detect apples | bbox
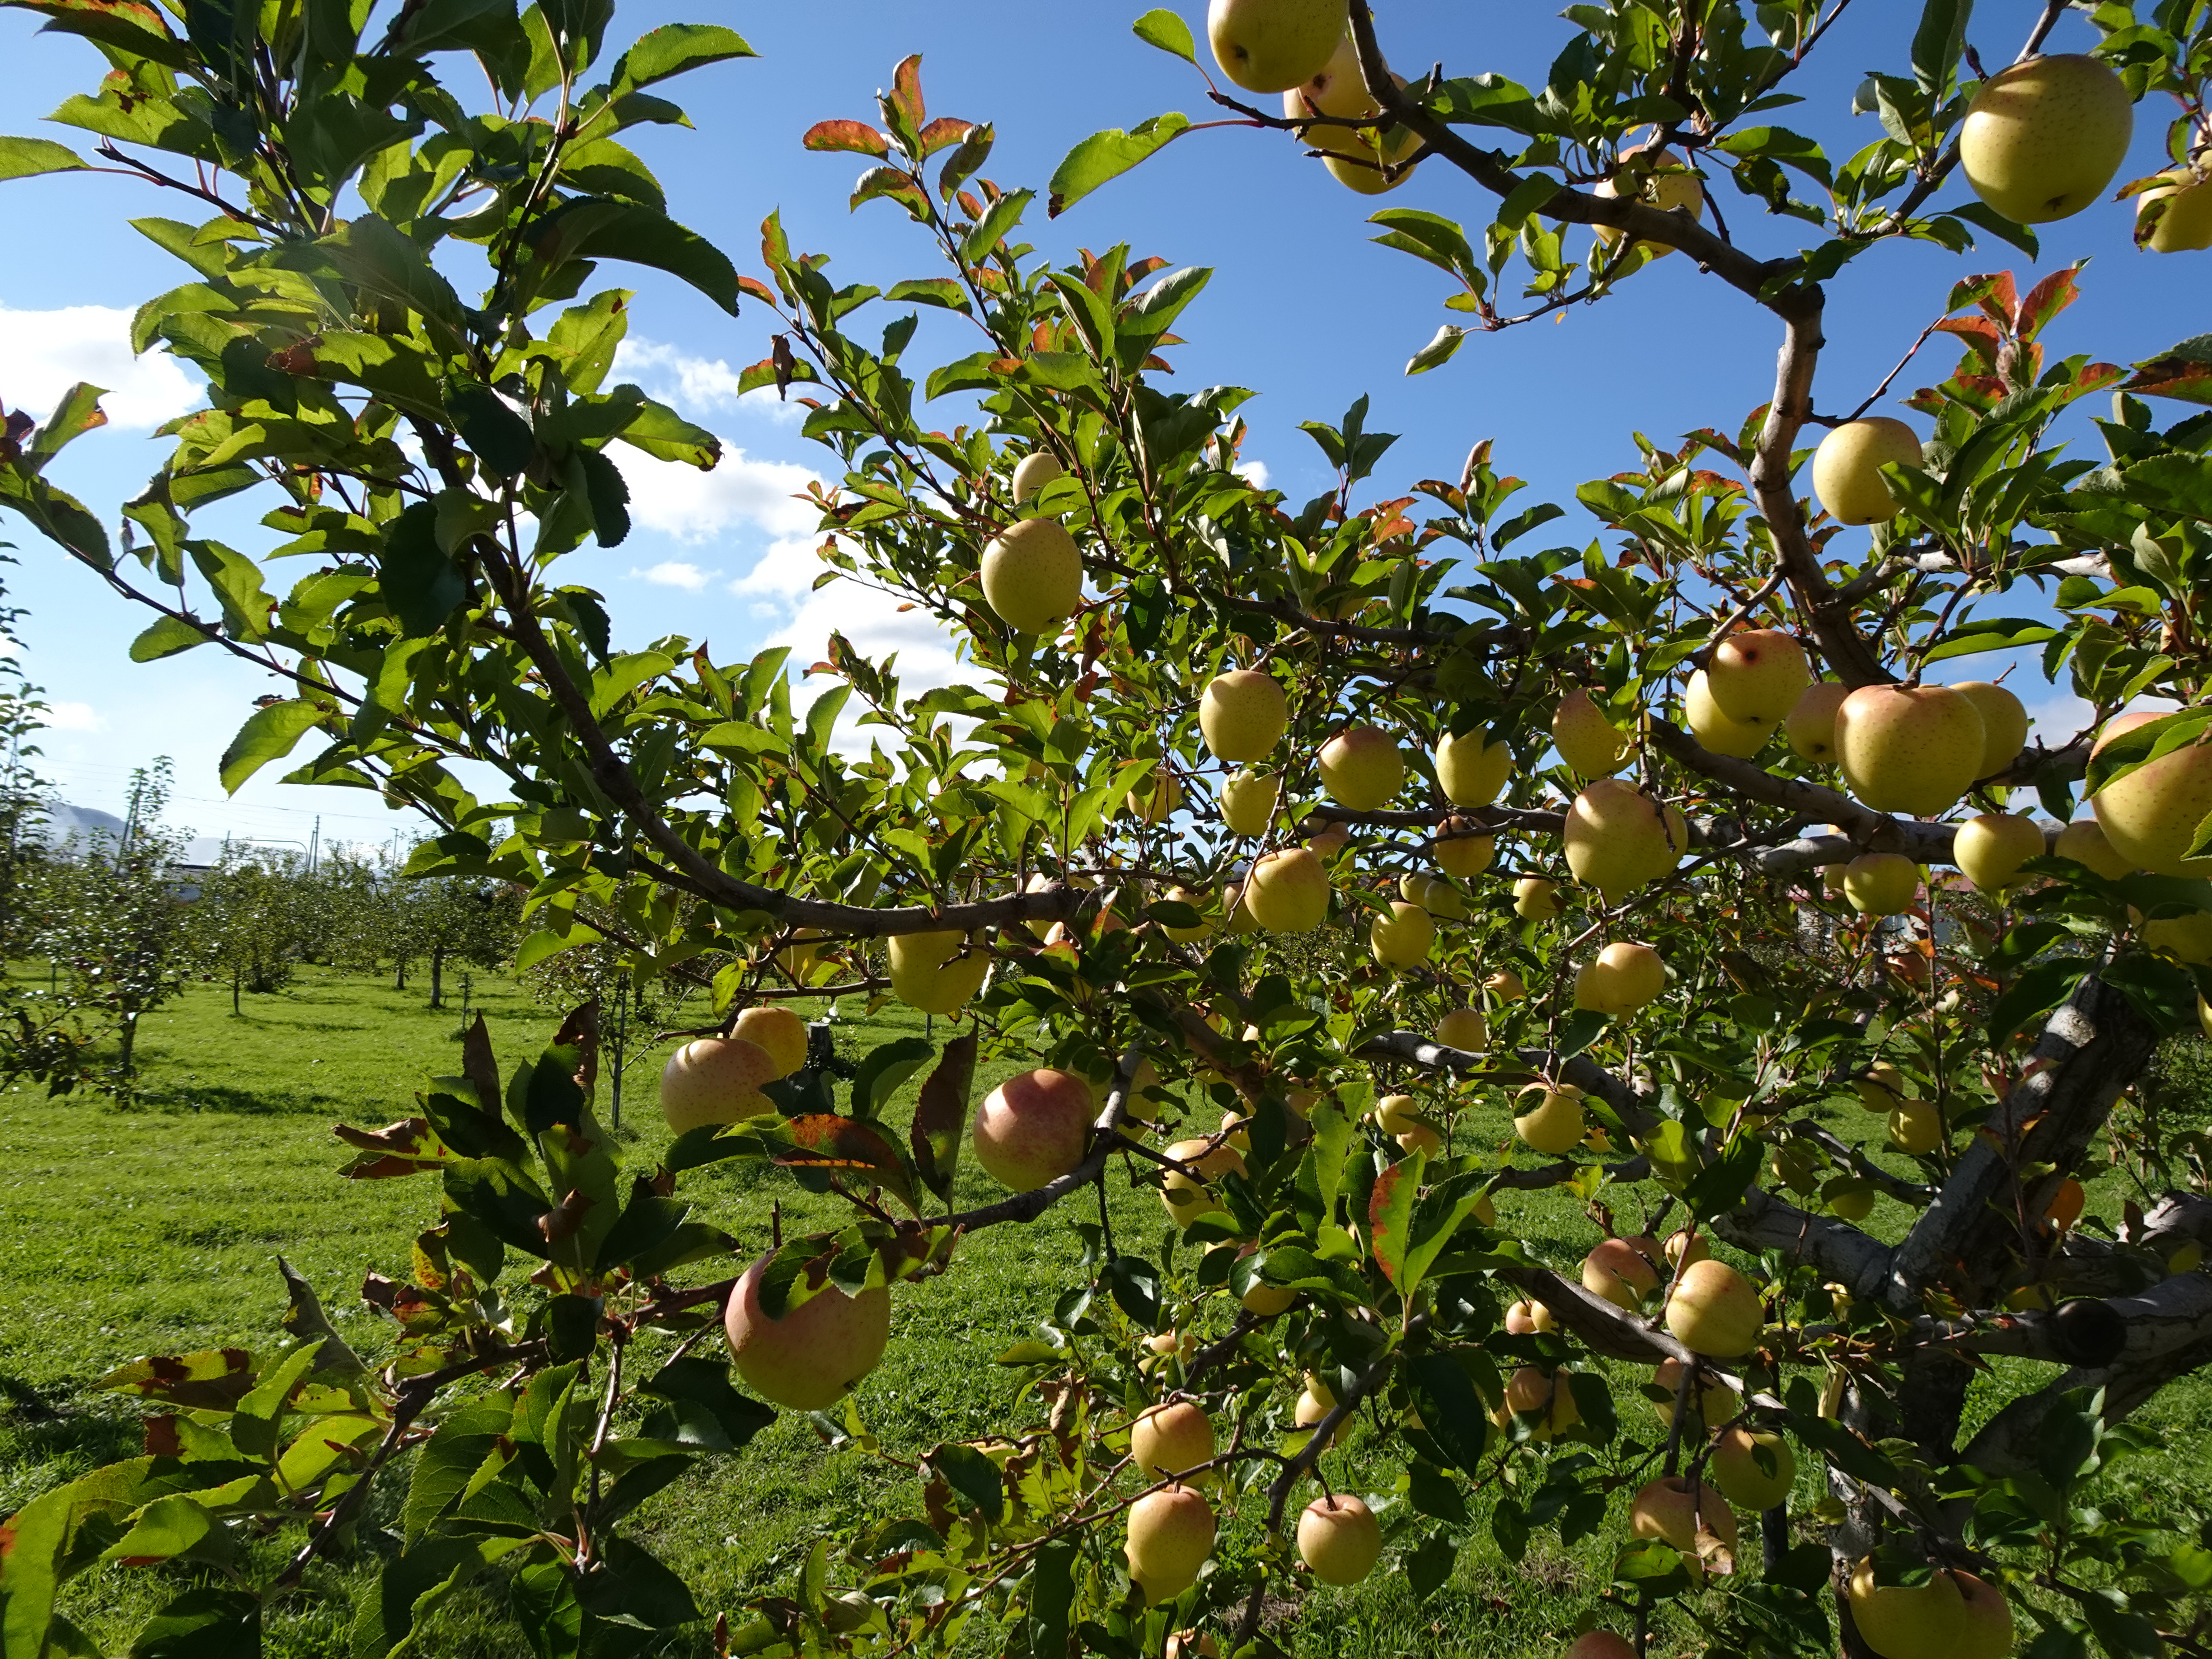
[728,1006,808,1083]
[1960,52,2134,226]
[1557,1626,1652,1659]
[661,1039,782,1159]
[1190,1045,1249,1098]
[1403,1371,1486,1431]
[1293,1381,1357,1453]
[1061,1045,1160,1151]
[1240,1016,1284,1066]
[1230,1243,1300,1317]
[1995,1258,2065,1323]
[2011,1175,2087,1239]
[1183,999,1222,1051]
[1623,1052,1653,1081]
[1041,907,1130,996]
[1126,1477,1215,1582]
[1362,1108,1381,1131]
[1600,1065,1629,1094]
[1244,847,1333,933]
[1206,0,1353,93]
[1815,855,1862,898]
[1204,1227,1262,1292]
[1316,724,1405,816]
[759,912,831,980]
[2045,1296,2129,1373]
[1137,1323,1205,1390]
[983,515,1084,637]
[1530,1292,1566,1337]
[1706,631,1809,727]
[1820,1172,1880,1228]
[1377,992,1395,1012]
[1436,1186,1498,1248]
[1664,1230,1713,1280]
[1436,1005,1491,1071]
[1371,899,1433,973]
[1504,1293,1550,1345]
[1819,1281,1855,1326]
[1887,1096,1949,1155]
[1952,812,2049,892]
[1506,1357,1588,1441]
[1982,1034,2057,1109]
[1853,1058,1905,1116]
[1931,680,2030,785]
[1300,1333,1376,1410]
[1296,1492,1380,1587]
[1844,853,1919,914]
[1125,1546,1200,1611]
[1197,669,1289,762]
[1488,1389,1533,1432]
[1419,878,1475,928]
[721,1238,893,1415]
[1769,1137,1831,1196]
[1218,762,1295,836]
[1652,1349,1738,1436]
[2138,168,2212,256]
[1025,755,1068,796]
[1627,1118,1660,1151]
[1154,879,1220,946]
[1219,871,1273,939]
[1436,725,1514,809]
[1513,1080,1594,1154]
[1304,832,1356,892]
[887,899,988,1015]
[1582,1237,1663,1327]
[2128,857,2212,968]
[1398,867,1443,909]
[1298,815,1352,869]
[1571,959,1635,1017]
[1596,941,1667,1015]
[1283,33,1389,150]
[2052,819,2152,907]
[1298,544,1372,621]
[1474,970,1528,1025]
[1574,1118,1623,1154]
[1128,1400,1215,1493]
[2141,1228,2189,1284]
[1372,1095,1420,1136]
[2084,713,2212,880]
[1552,680,1652,780]
[1129,766,1179,819]
[975,1067,1097,1193]
[1434,811,1494,879]
[1848,1542,1963,1659]
[1009,451,1077,521]
[1021,866,1102,948]
[1885,945,1930,985]
[1761,1319,1804,1355]
[1742,1098,1779,1137]
[1281,1074,1323,1114]
[1391,996,1413,1016]
[1565,776,1689,892]
[1812,414,1926,526]
[1511,863,1568,925]
[1666,1258,1767,1355]
[1625,1075,1653,1108]
[1912,1564,2015,1659]
[1709,1420,1797,1511]
[1788,682,1858,766]
[1156,1136,1257,1242]
[1156,1626,1225,1659]
[1221,1095,1263,1155]
[1684,660,1780,764]
[2198,971,2212,1056]
[1317,66,1420,195]
[1629,1474,1742,1589]
[1835,682,1988,819]
[1590,140,1703,262]
[1392,1123,1442,1166]
[2193,113,2212,193]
